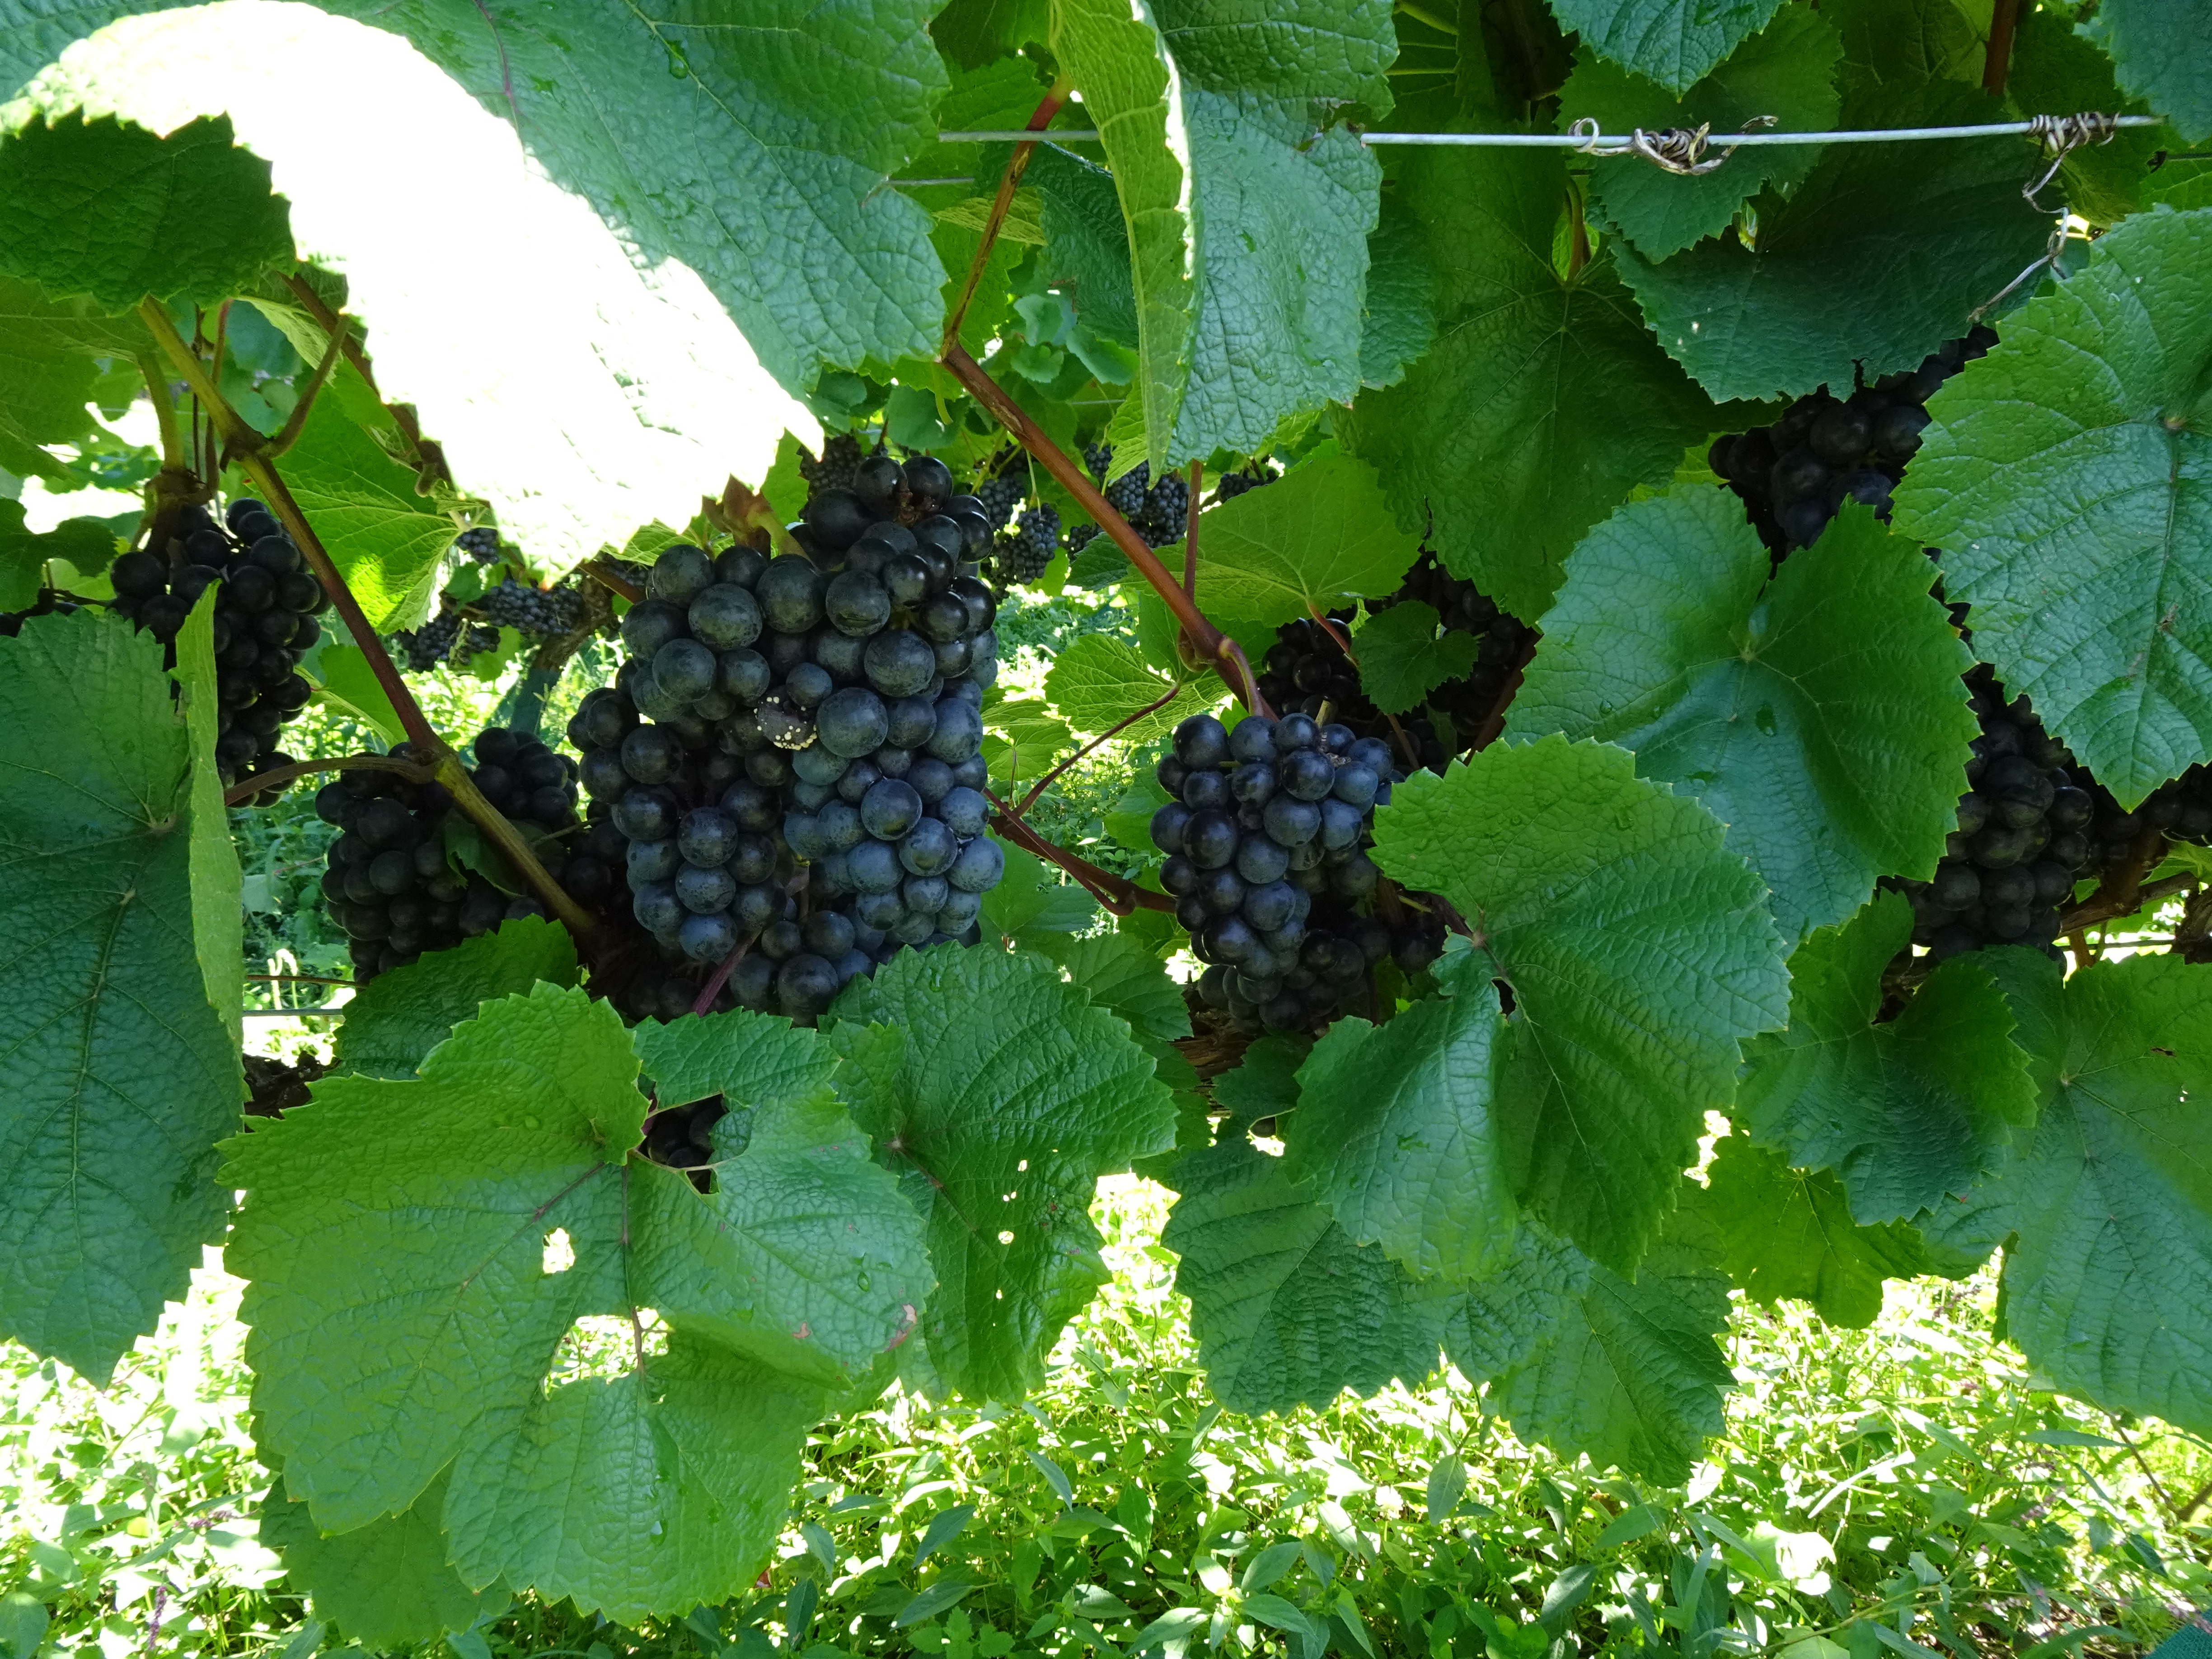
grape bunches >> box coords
[962,488,1033,522]
[1085,488,1198,548]
[448,617,503,671]
[560,800,661,938]
[999,500,1060,586]
[468,728,581,936]
[1147,711,1395,999]
[1388,545,1530,754]
[2083,756,2212,865]
[621,456,1002,946]
[1108,457,1188,487]
[452,525,505,569]
[1077,438,1195,487]
[800,430,864,487]
[731,909,875,1024]
[477,576,584,641]
[1065,519,1104,560]
[1880,667,2088,983]
[568,656,808,965]
[1078,437,1116,485]
[1708,338,1962,560]
[1253,599,1359,721]
[1192,904,1434,1040]
[1384,719,1450,777]
[105,500,332,807]
[315,742,471,995]
[396,607,456,675]
[591,969,739,1181]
